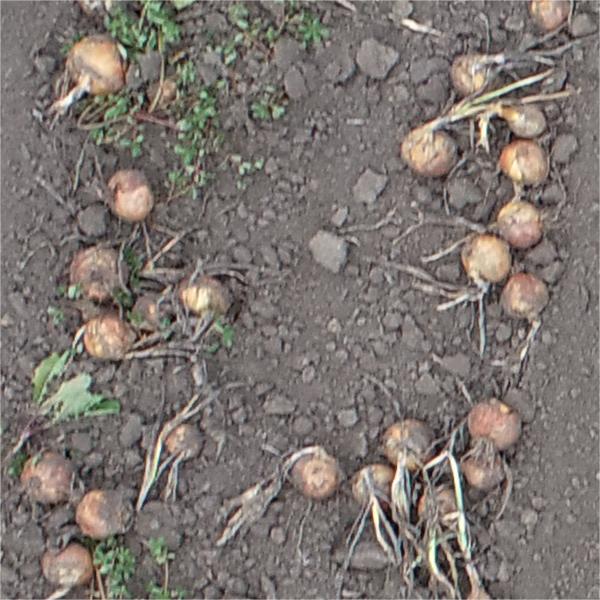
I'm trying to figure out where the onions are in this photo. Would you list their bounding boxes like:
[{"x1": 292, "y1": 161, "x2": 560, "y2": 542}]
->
[
  {"x1": 164, "y1": 423, "x2": 197, "y2": 459},
  {"x1": 70, "y1": 245, "x2": 122, "y2": 301},
  {"x1": 452, "y1": 55, "x2": 501, "y2": 96},
  {"x1": 41, "y1": 543, "x2": 92, "y2": 588},
  {"x1": 465, "y1": 236, "x2": 513, "y2": 283},
  {"x1": 528, "y1": 0, "x2": 567, "y2": 35},
  {"x1": 500, "y1": 140, "x2": 545, "y2": 183},
  {"x1": 380, "y1": 417, "x2": 433, "y2": 466},
  {"x1": 293, "y1": 450, "x2": 339, "y2": 500},
  {"x1": 501, "y1": 103, "x2": 542, "y2": 137},
  {"x1": 106, "y1": 169, "x2": 150, "y2": 221},
  {"x1": 419, "y1": 485, "x2": 461, "y2": 528},
  {"x1": 22, "y1": 451, "x2": 74, "y2": 502},
  {"x1": 499, "y1": 276, "x2": 545, "y2": 319},
  {"x1": 52, "y1": 35, "x2": 121, "y2": 113},
  {"x1": 76, "y1": 489, "x2": 128, "y2": 538},
  {"x1": 180, "y1": 279, "x2": 223, "y2": 315},
  {"x1": 402, "y1": 128, "x2": 457, "y2": 177},
  {"x1": 353, "y1": 463, "x2": 390, "y2": 503},
  {"x1": 461, "y1": 443, "x2": 503, "y2": 490},
  {"x1": 468, "y1": 400, "x2": 520, "y2": 449},
  {"x1": 498, "y1": 201, "x2": 539, "y2": 247},
  {"x1": 80, "y1": 313, "x2": 130, "y2": 358}
]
